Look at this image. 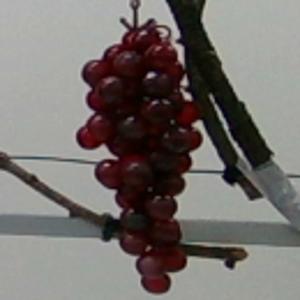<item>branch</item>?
<instances>
[{
	"instance_id": "1",
	"label": "branch",
	"mask_w": 300,
	"mask_h": 300,
	"mask_svg": "<svg viewBox=\"0 0 300 300\" xmlns=\"http://www.w3.org/2000/svg\"><path fill=\"white\" fill-rule=\"evenodd\" d=\"M207 0H164L179 33L185 74L181 89L198 104L202 125L223 163L220 179L247 201L265 199L300 231V189L281 166L255 114L228 77L204 22ZM217 109H219V113L222 115V119H224L225 123L227 124V127H228V133L226 132V129H225V126H224V122L220 119V116L218 114V111ZM229 135L231 136L232 141H234V143L238 146V148L240 149L241 153L243 154L244 158L246 159V162L240 157V155L238 154L237 150L235 149L233 143L231 142Z\"/></svg>"
},
{
	"instance_id": "2",
	"label": "branch",
	"mask_w": 300,
	"mask_h": 300,
	"mask_svg": "<svg viewBox=\"0 0 300 300\" xmlns=\"http://www.w3.org/2000/svg\"><path fill=\"white\" fill-rule=\"evenodd\" d=\"M0 170L15 178L20 183L34 191L36 194L55 203L58 207L69 211L68 219L82 221L89 226L100 229V241L109 244L111 241L120 240L122 231L120 219L110 212H96L84 206L80 201L64 195L62 192L50 187L32 171L18 164L4 150L0 149Z\"/></svg>"
},
{
	"instance_id": "3",
	"label": "branch",
	"mask_w": 300,
	"mask_h": 300,
	"mask_svg": "<svg viewBox=\"0 0 300 300\" xmlns=\"http://www.w3.org/2000/svg\"><path fill=\"white\" fill-rule=\"evenodd\" d=\"M179 242L187 257L224 261V268L229 271L235 270L238 262H244L250 256L245 246H210Z\"/></svg>"
}]
</instances>
